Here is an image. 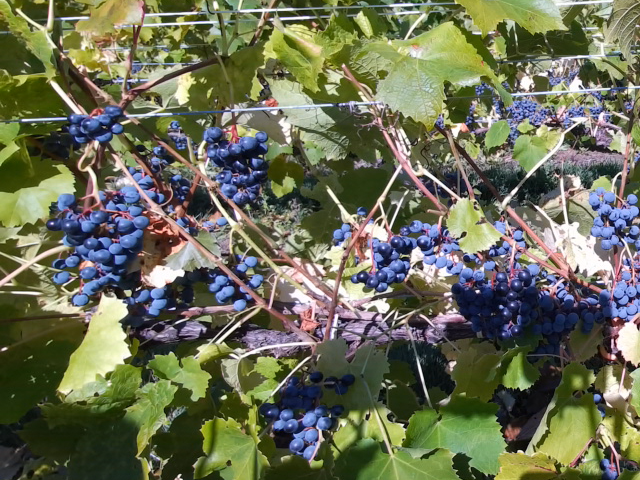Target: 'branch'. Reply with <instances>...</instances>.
Instances as JSON below:
<instances>
[{
  "mask_svg": "<svg viewBox=\"0 0 640 480\" xmlns=\"http://www.w3.org/2000/svg\"><path fill=\"white\" fill-rule=\"evenodd\" d=\"M394 123L400 133V135L403 137L404 141L406 142V145L409 149V152L411 154V157L413 159V161L416 163L418 169L420 170V172L426 176L427 178H429L432 181H436L439 186L445 190L447 193H449L454 199L459 200L460 196L455 193L449 186H447L444 182H441L440 179L434 175L432 172H429L427 169H425L420 161V159L418 158V156L416 155V152L414 150V147L412 145L411 140L409 139L408 135L406 134L405 130L402 127V124L400 123L398 118L394 119Z\"/></svg>",
  "mask_w": 640,
  "mask_h": 480,
  "instance_id": "obj_6",
  "label": "branch"
},
{
  "mask_svg": "<svg viewBox=\"0 0 640 480\" xmlns=\"http://www.w3.org/2000/svg\"><path fill=\"white\" fill-rule=\"evenodd\" d=\"M49 83L51 84V86L54 88V90L56 91L57 95L73 110V112L75 114H79L80 110L74 105L73 102H71L70 99H68L64 93L61 91V89L59 88V86L57 85V83L55 82L54 79H50Z\"/></svg>",
  "mask_w": 640,
  "mask_h": 480,
  "instance_id": "obj_11",
  "label": "branch"
},
{
  "mask_svg": "<svg viewBox=\"0 0 640 480\" xmlns=\"http://www.w3.org/2000/svg\"><path fill=\"white\" fill-rule=\"evenodd\" d=\"M65 60L74 68L75 72L77 74H79V76L82 78V80L85 83H88V85L91 87V89L96 92L97 94L101 95L102 97H104L107 101H109L113 106L117 105V102L106 92H104L103 90L99 89L94 82L91 79H88V77L84 74V72L79 68V66L74 62V60L69 56L66 55L65 56Z\"/></svg>",
  "mask_w": 640,
  "mask_h": 480,
  "instance_id": "obj_7",
  "label": "branch"
},
{
  "mask_svg": "<svg viewBox=\"0 0 640 480\" xmlns=\"http://www.w3.org/2000/svg\"><path fill=\"white\" fill-rule=\"evenodd\" d=\"M506 209L509 211L510 215L515 219V221L529 235V237L537 244V246L549 257L550 262L554 266H552L551 264L546 262L544 259H542L538 255L528 251L524 246H522L520 243L516 242L515 240L511 239L510 237H508L506 235H502L501 236L502 240H504L505 242H507L510 245H513L514 247L519 249L524 255L534 259L536 262H538L539 264L543 265L549 271H551L553 273H557L558 275L570 278L572 281H576V282L580 283L581 285H583L587 289L592 290L595 293H601L602 292L601 288H597L593 284H590L589 282H586L583 278H580L578 276H574L572 273H570V270L567 268V265L563 264L557 258H555L554 254L540 241V239L532 232V230L526 225V223L518 216V214L515 212L513 207L510 206V205H507Z\"/></svg>",
  "mask_w": 640,
  "mask_h": 480,
  "instance_id": "obj_3",
  "label": "branch"
},
{
  "mask_svg": "<svg viewBox=\"0 0 640 480\" xmlns=\"http://www.w3.org/2000/svg\"><path fill=\"white\" fill-rule=\"evenodd\" d=\"M369 110L372 114V118L375 121V125L378 128V131L381 133L382 137L384 138V140L386 141V143L388 144L389 148L391 149V151L395 154V156L399 159V162L397 163V165L393 168V171L389 177V180L387 182V184L385 185V187L383 188V190L380 192V194L377 196V198L375 199V201L373 202V204L371 205V207L367 210V213L364 217V219L362 220V222L358 225V227L356 228L355 232L353 233L352 238L350 239L348 246L344 249L342 257H341V261H340V266L338 268V272L335 276L333 285H332V289L330 290L327 286H325L323 283L319 282L317 279H315L305 268H303L291 255H289L277 242H275L272 237L266 233L261 227H259L258 225H256L253 221L250 220L249 216L240 208H238L233 200L231 198H228L226 195H224L221 190L217 187V185L211 181L210 179H208L205 175V171H204V166H203V157H202V150L203 147L206 145V141L202 140L199 144H198V148H197V160H198V168L192 163L190 162L184 155H182L180 152H178L174 147H172L170 144H168L166 141H164L161 137H159L153 130L149 129L147 126H145L139 119L137 118H130V120L132 122H134L136 125H138V127L142 130L145 131L147 134H150L152 138H154L158 143H160L163 147H165L167 150H169L172 154H174L177 158H179L180 160H182L193 172H195L202 180V183L204 185V187L206 188V190L209 192L210 198L212 200V202L214 203V205L217 207V209L220 211V213L224 216V218L226 219V221L233 227V229L238 232L245 240L246 242L249 244V246L253 249V251L272 269L274 270L278 275H280L282 278H284L287 282H289L290 284H293L294 286H296L304 295H306L307 297H309L311 300H313L317 305L321 306L324 310L328 309V305L324 302L321 301L319 298H317L313 293H311L309 290H307L306 288H304V286L302 284H300L298 281H296L295 279H292L289 275H287L286 273H284L282 270H280L272 261H270L267 256L261 252L258 247L254 244V242L252 241V239L244 232L243 229H241L238 224L236 222L233 221V219L231 218V216L228 214V212L224 209V207L219 203V201L217 200L216 196H215V192L214 190L219 194L220 197H222L226 203H229L231 205V207L240 214V218L243 220L244 224L247 227H252L260 237H262L265 242L272 248L274 249L285 261H287L296 271H298L311 285H313L315 288L321 290L327 297H330V302H329V312H328V318H327V325H326V329L324 331V340L328 341L329 340V332H330V325L331 322L333 320V315H334V304H335V300H336V292H337V288H338V284L340 282V279L343 275V270L345 269V264H346V260H347V256L349 254V252L352 250L354 243L356 242L358 235L360 234V232L363 230V228L366 226V224L368 223V221L370 220V217L372 215V213L374 212V210L378 207V205L380 204L381 200L383 199V197L387 194V192L390 190L394 179L396 177V175L398 174V171L401 169V167L404 165V167L406 168L410 179L413 181V183L415 185L418 186L419 189H421L425 195L434 202L435 206L437 207V210L439 212H447L448 208L445 206V204L443 203L442 200H440L436 195L431 194V192L429 191V189L422 184L417 177L415 176L411 165L408 163L407 159L404 158L400 152L398 151V149L396 148V146L394 145V143L391 141L390 137L387 135L386 131L383 129L382 124L380 123V118H379V111L375 106H370Z\"/></svg>",
  "mask_w": 640,
  "mask_h": 480,
  "instance_id": "obj_1",
  "label": "branch"
},
{
  "mask_svg": "<svg viewBox=\"0 0 640 480\" xmlns=\"http://www.w3.org/2000/svg\"><path fill=\"white\" fill-rule=\"evenodd\" d=\"M435 129L442 135L445 136L446 135V131L448 134V139H449V144H450V150L451 153L453 155V158L459 168V171L461 173L462 176V181L464 183V188L467 192V195L470 198H474L475 194L472 192V185L469 184V180L467 178V174H466V170L464 169L463 163L461 162L459 155L456 151V149L458 150V152L468 161V163L470 164V166L473 168V170L477 173L478 177L482 180L483 184L485 185V187L491 192L492 196L494 198H496L499 202L503 201V197L498 194L495 190V188L489 183V181L487 180V178L485 177V175L483 174V172L481 171V169L476 165V163L474 162V160L471 158V155L468 154L459 144L458 141H454V137H453V132H452V128L451 127H447L446 131L439 125L436 124L435 125Z\"/></svg>",
  "mask_w": 640,
  "mask_h": 480,
  "instance_id": "obj_4",
  "label": "branch"
},
{
  "mask_svg": "<svg viewBox=\"0 0 640 480\" xmlns=\"http://www.w3.org/2000/svg\"><path fill=\"white\" fill-rule=\"evenodd\" d=\"M106 149L111 157L114 159L115 163L122 171L124 177L128 180V182L133 186L135 191L139 194L140 198L148 205L150 209H152L156 216L162 221L165 222L168 226L176 229L180 234H182L190 243H192L204 256L210 259L214 264H216L219 268H221L226 274L231 275L236 282L242 286L248 293L252 295V297L265 309L273 313L276 317H278L285 325L289 326L291 329H294L297 333H299L304 339L317 343L319 338L311 333H308L303 327L294 322L292 319L286 317L277 307L272 305L266 299H264L250 284H248L241 275L234 269L225 264L221 259H219L214 253L210 252L204 245H202L191 233H189L181 224L172 220L169 216H166L162 210L153 202V200L146 194L144 189L138 183V181L131 175L128 167L125 165L121 157L118 155L116 150L114 149L113 143L108 141L106 143Z\"/></svg>",
  "mask_w": 640,
  "mask_h": 480,
  "instance_id": "obj_2",
  "label": "branch"
},
{
  "mask_svg": "<svg viewBox=\"0 0 640 480\" xmlns=\"http://www.w3.org/2000/svg\"><path fill=\"white\" fill-rule=\"evenodd\" d=\"M104 145L99 143L93 155V170L96 175L101 173Z\"/></svg>",
  "mask_w": 640,
  "mask_h": 480,
  "instance_id": "obj_9",
  "label": "branch"
},
{
  "mask_svg": "<svg viewBox=\"0 0 640 480\" xmlns=\"http://www.w3.org/2000/svg\"><path fill=\"white\" fill-rule=\"evenodd\" d=\"M342 68L345 70V72L347 73L348 77L355 83V85L359 89V91L362 94V96L366 100H370L372 98V95L368 92V90L366 89V87L362 83V81L359 79V77L354 73V71L352 70L351 66L347 62H344L342 64Z\"/></svg>",
  "mask_w": 640,
  "mask_h": 480,
  "instance_id": "obj_8",
  "label": "branch"
},
{
  "mask_svg": "<svg viewBox=\"0 0 640 480\" xmlns=\"http://www.w3.org/2000/svg\"><path fill=\"white\" fill-rule=\"evenodd\" d=\"M218 63V60L216 58H212L210 60H203V61H199L196 64H192V65H188L186 67L183 68H178L175 69L171 72H169L166 75H163L161 77H158L156 79L150 80L144 84L138 85V86H134L133 88H131L126 95L121 99L119 106L121 108H124L127 103L133 98V96L137 93L146 91L148 89H151L152 87L161 85L165 82L170 81L171 79L178 77L180 75H185L188 74L190 72H194V71H198L201 68H205V67H212L214 65H216Z\"/></svg>",
  "mask_w": 640,
  "mask_h": 480,
  "instance_id": "obj_5",
  "label": "branch"
},
{
  "mask_svg": "<svg viewBox=\"0 0 640 480\" xmlns=\"http://www.w3.org/2000/svg\"><path fill=\"white\" fill-rule=\"evenodd\" d=\"M92 183H93V179L91 177H88L85 180L84 201H83V206H82V210L84 212H87L89 210V208H90Z\"/></svg>",
  "mask_w": 640,
  "mask_h": 480,
  "instance_id": "obj_10",
  "label": "branch"
}]
</instances>
